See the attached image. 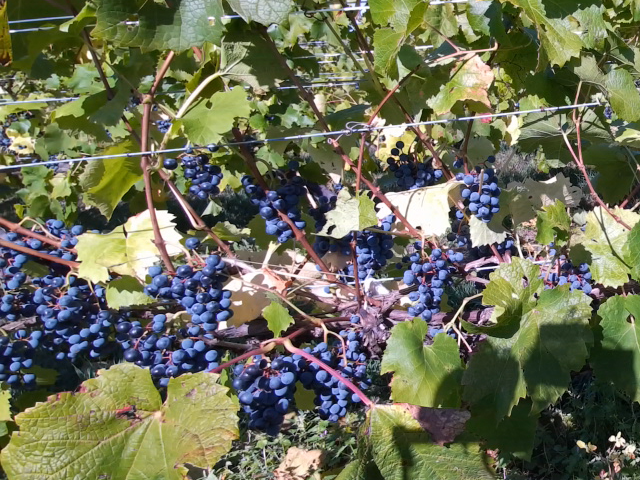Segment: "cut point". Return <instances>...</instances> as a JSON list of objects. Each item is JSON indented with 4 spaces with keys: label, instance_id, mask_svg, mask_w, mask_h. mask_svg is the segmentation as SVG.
<instances>
[{
    "label": "cut point",
    "instance_id": "4",
    "mask_svg": "<svg viewBox=\"0 0 640 480\" xmlns=\"http://www.w3.org/2000/svg\"><path fill=\"white\" fill-rule=\"evenodd\" d=\"M253 159H254V161L261 162L265 166L267 171L271 172V168L269 167L268 163L265 160L260 159V158H253Z\"/></svg>",
    "mask_w": 640,
    "mask_h": 480
},
{
    "label": "cut point",
    "instance_id": "3",
    "mask_svg": "<svg viewBox=\"0 0 640 480\" xmlns=\"http://www.w3.org/2000/svg\"><path fill=\"white\" fill-rule=\"evenodd\" d=\"M27 221H31V222H33L34 224H38V221H37L36 219H34V218H32V217H25L23 220L19 221V222L17 223V225H19V226H20V225H22L23 223H25V222H27Z\"/></svg>",
    "mask_w": 640,
    "mask_h": 480
},
{
    "label": "cut point",
    "instance_id": "2",
    "mask_svg": "<svg viewBox=\"0 0 640 480\" xmlns=\"http://www.w3.org/2000/svg\"><path fill=\"white\" fill-rule=\"evenodd\" d=\"M278 340H279V338H267V339H265L263 341H260L258 343V347L273 343V342L278 341Z\"/></svg>",
    "mask_w": 640,
    "mask_h": 480
},
{
    "label": "cut point",
    "instance_id": "1",
    "mask_svg": "<svg viewBox=\"0 0 640 480\" xmlns=\"http://www.w3.org/2000/svg\"><path fill=\"white\" fill-rule=\"evenodd\" d=\"M164 242H165V244H169V245H172V246H177L178 248H180L185 253L186 256H189L188 250L184 246H182L180 243H175V242H171V241H164Z\"/></svg>",
    "mask_w": 640,
    "mask_h": 480
},
{
    "label": "cut point",
    "instance_id": "5",
    "mask_svg": "<svg viewBox=\"0 0 640 480\" xmlns=\"http://www.w3.org/2000/svg\"><path fill=\"white\" fill-rule=\"evenodd\" d=\"M73 271H74V268L71 267L70 270L67 273L66 280H65V285H68V279L70 278V276H77V274L72 273Z\"/></svg>",
    "mask_w": 640,
    "mask_h": 480
}]
</instances>
